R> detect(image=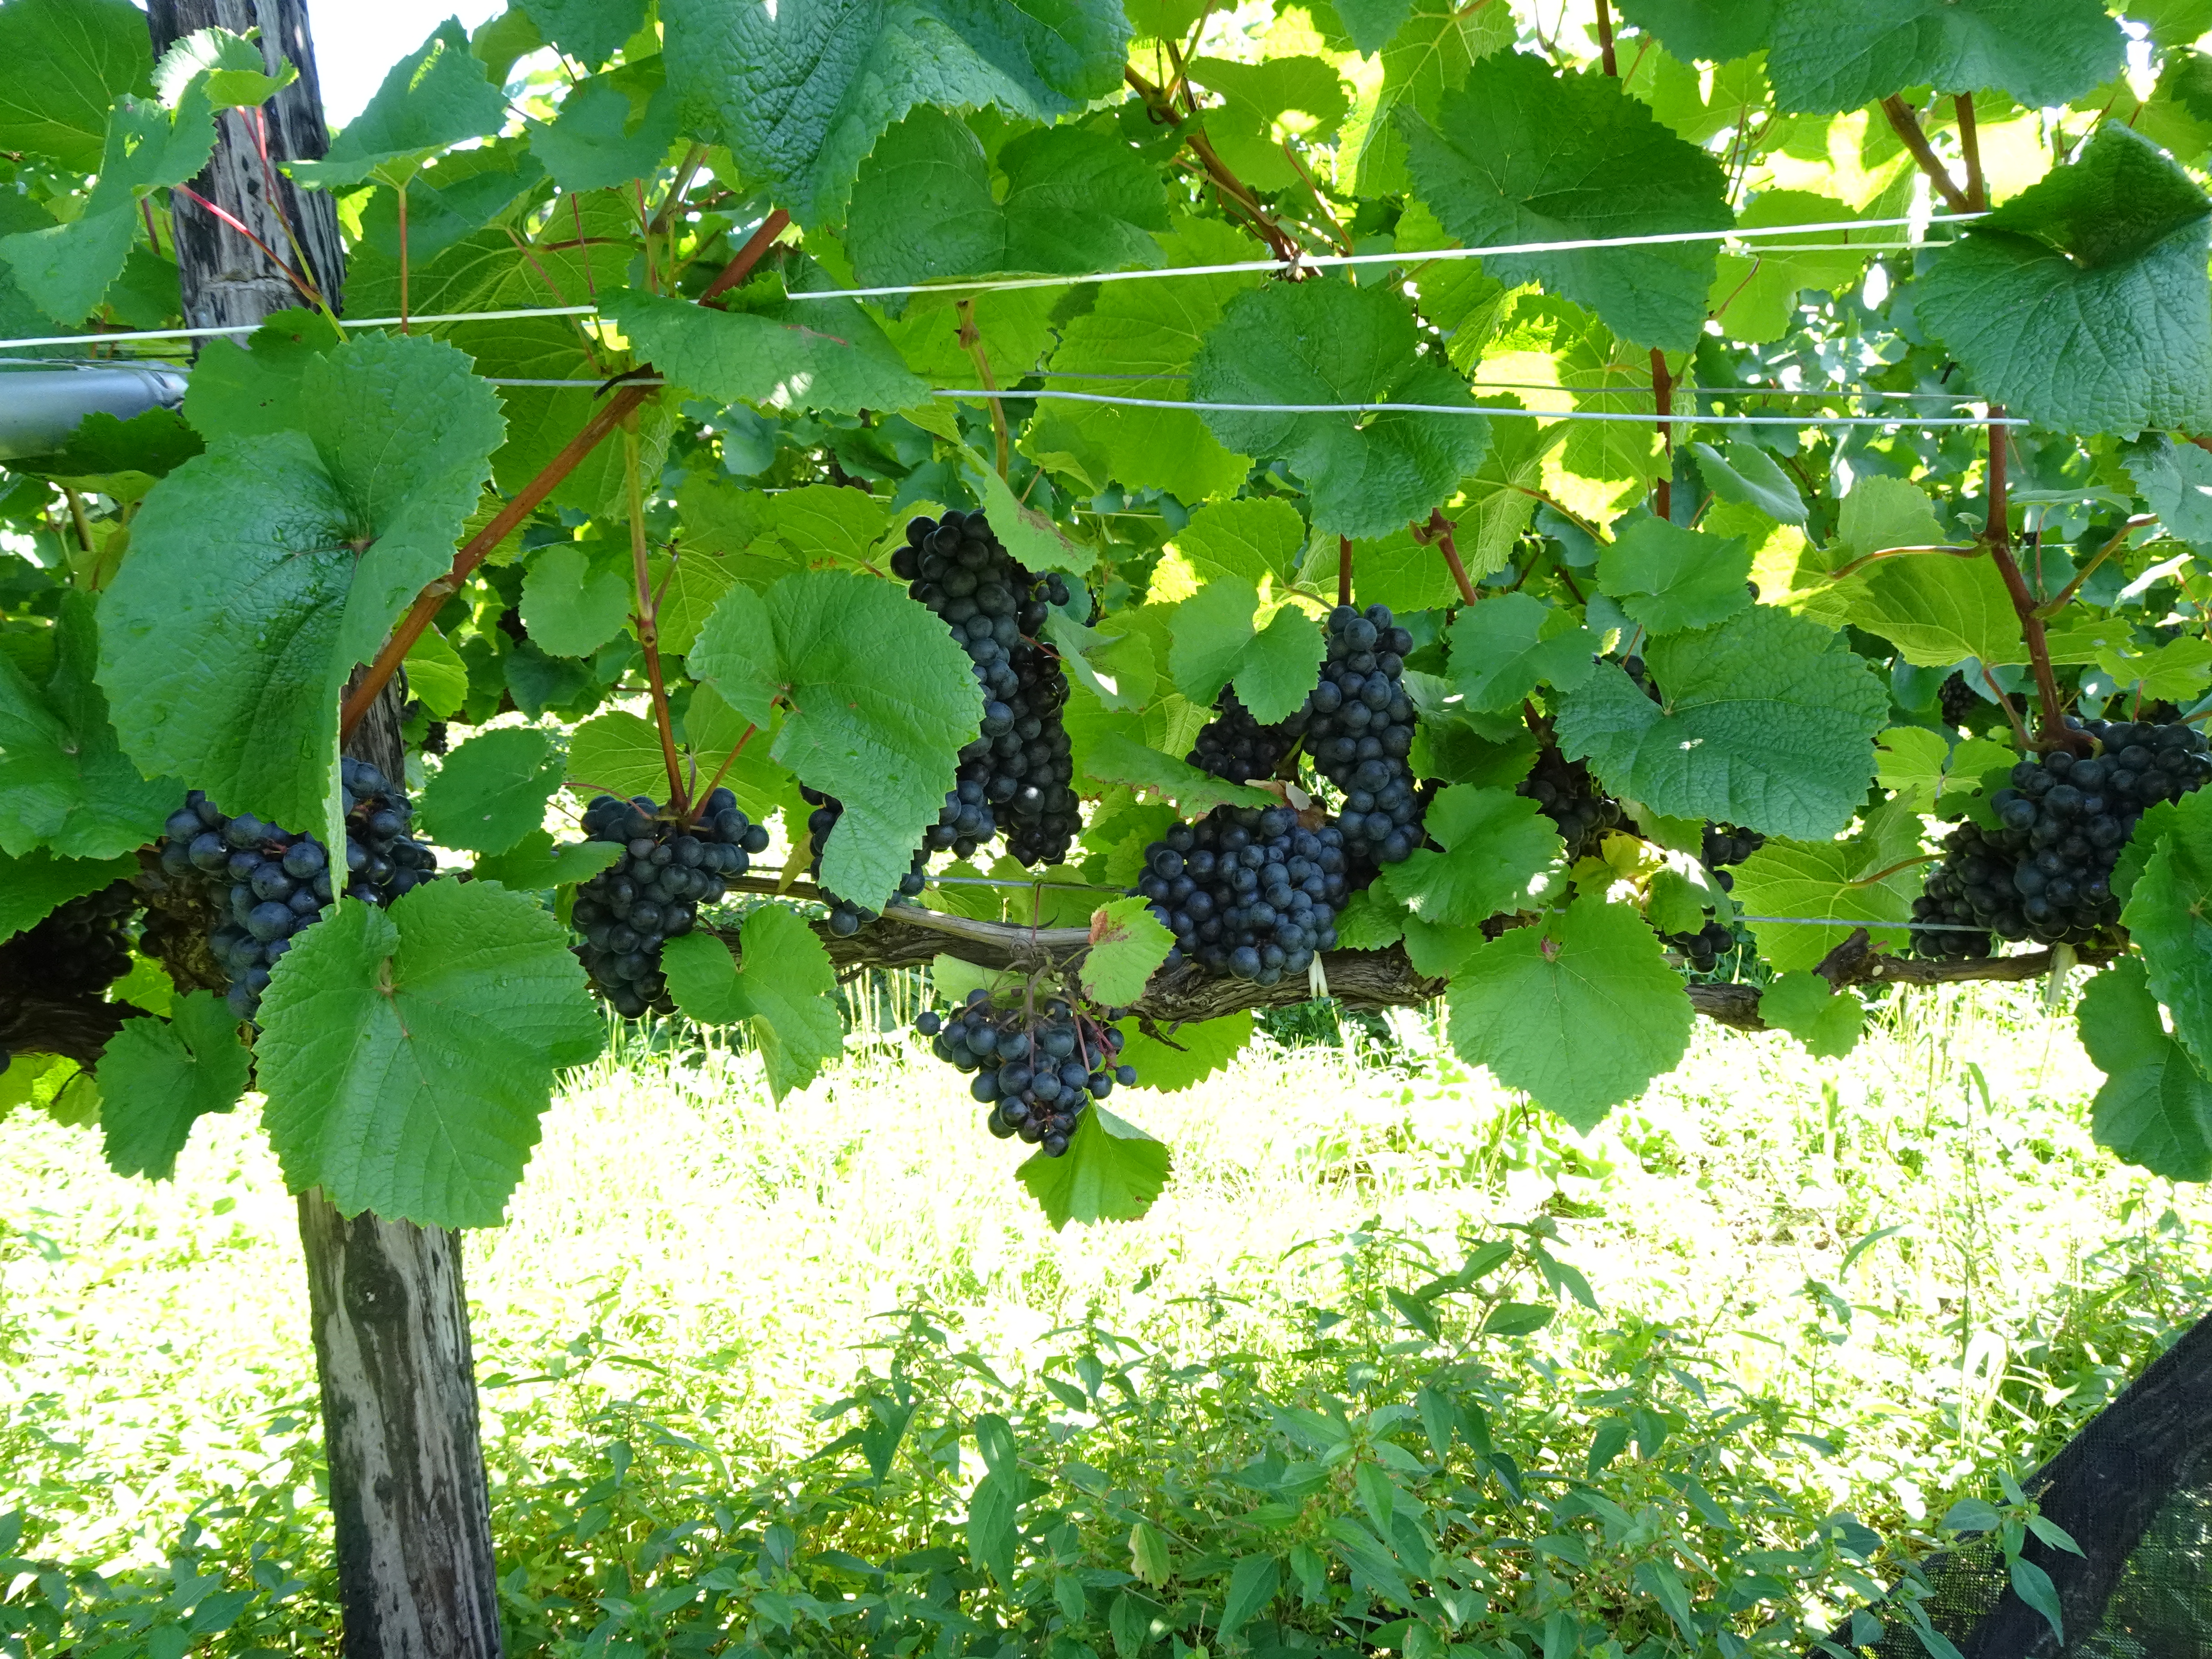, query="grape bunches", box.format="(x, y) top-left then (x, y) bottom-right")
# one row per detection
(163, 757), (437, 1030)
(889, 507), (1069, 736)
(961, 642), (1082, 867)
(1129, 818), (1240, 977)
(0, 878), (147, 1000)
(1216, 795), (1351, 989)
(1515, 751), (1641, 902)
(1590, 651), (1651, 699)
(572, 788), (769, 1020)
(1700, 819), (1765, 866)
(1643, 867), (1735, 974)
(1186, 681), (1296, 788)
(798, 781), (931, 938)
(1990, 750), (2123, 952)
(138, 907), (184, 957)
(925, 780), (996, 860)
(1282, 604), (1428, 866)
(916, 989), (1136, 1157)
(2037, 715), (2212, 847)
(0, 992), (22, 1076)
(1908, 787), (2029, 960)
